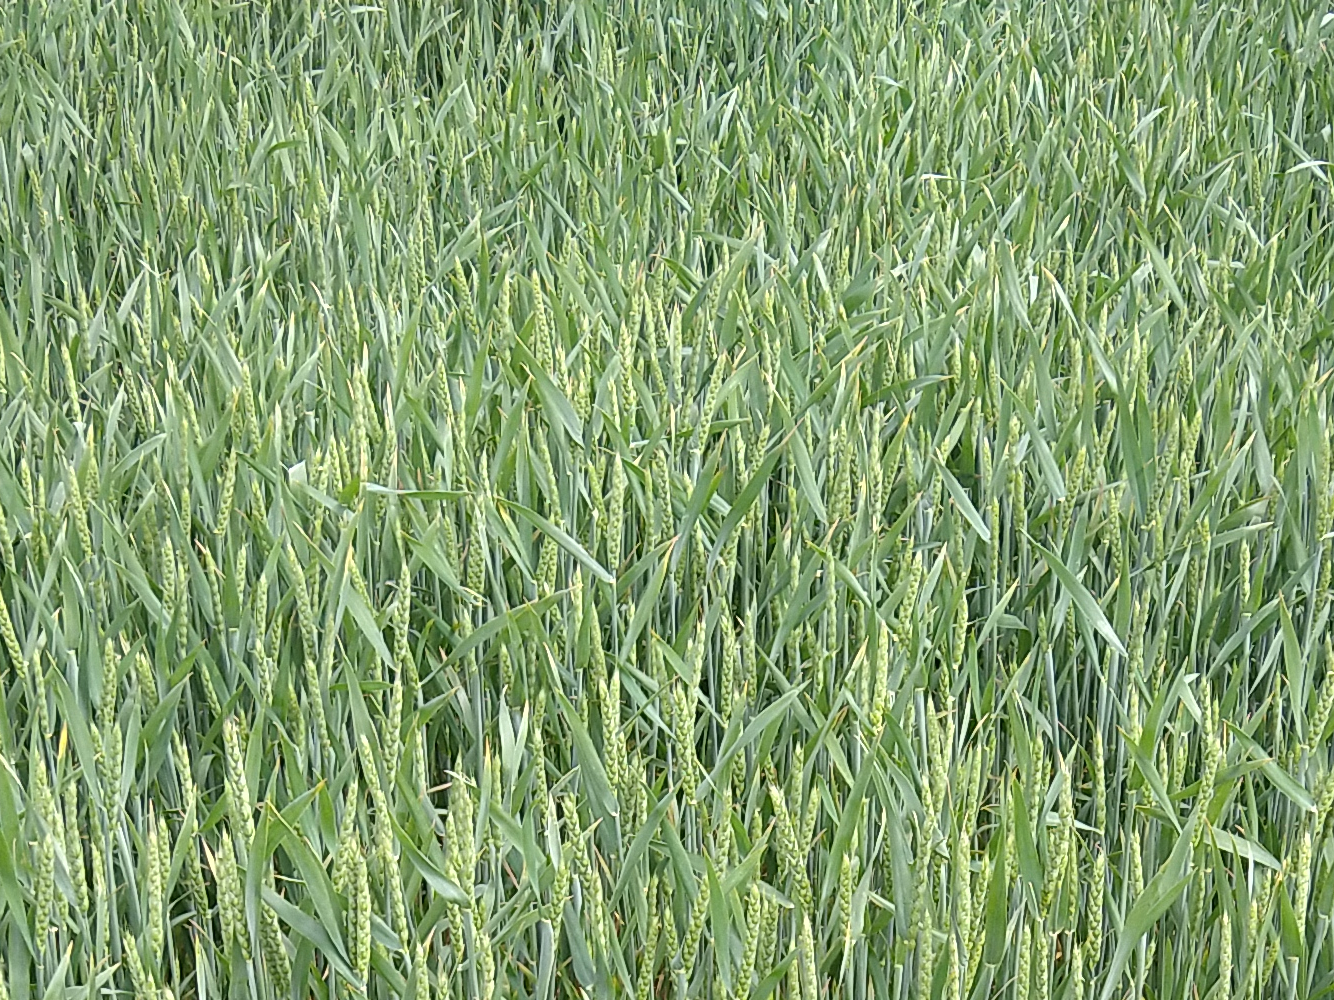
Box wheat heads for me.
[361,367,376,439]
[231,102,249,165]
[650,877,657,917]
[736,118,745,146]
[942,722,955,769]
[768,783,814,913]
[86,459,99,507]
[75,87,89,128]
[496,642,515,698]
[369,19,381,63]
[896,703,919,741]
[912,919,930,1000]
[1256,865,1270,916]
[120,937,149,997]
[687,319,705,398]
[143,391,153,433]
[136,653,159,716]
[423,203,436,272]
[969,348,978,398]
[251,480,269,554]
[1055,339,1084,420]
[735,440,747,499]
[435,960,451,1000]
[530,520,555,579]
[968,854,989,935]
[499,15,514,60]
[791,550,800,596]
[0,474,11,565]
[1009,663,1018,678]
[296,563,313,655]
[1079,146,1100,206]
[731,828,738,866]
[749,420,754,467]
[916,78,925,133]
[510,474,522,512]
[722,519,742,585]
[1129,829,1140,901]
[543,542,558,591]
[693,622,706,689]
[387,170,400,211]
[706,165,719,211]
[221,730,258,847]
[454,412,464,479]
[512,137,521,168]
[931,664,950,724]
[379,183,387,217]
[285,686,307,746]
[94,572,103,617]
[1153,661,1162,695]
[32,521,39,565]
[1028,264,1057,327]
[624,258,637,291]
[643,502,656,554]
[947,932,962,1000]
[1027,735,1044,836]
[612,230,623,265]
[1040,757,1051,795]
[394,50,399,74]
[589,872,608,963]
[258,896,291,995]
[1313,775,1328,806]
[715,975,731,1000]
[343,81,348,114]
[786,946,816,1000]
[187,392,203,446]
[147,166,159,213]
[892,170,905,229]
[929,852,939,903]
[1125,190,1134,228]
[1121,351,1129,391]
[339,289,346,348]
[409,38,420,91]
[701,311,716,357]
[921,427,932,460]
[1017,326,1028,361]
[952,343,960,389]
[171,151,180,193]
[761,329,773,415]
[642,186,651,242]
[1327,764,1334,825]
[859,657,871,714]
[570,568,584,639]
[233,191,240,245]
[1172,313,1182,347]
[1188,751,1222,841]
[1009,706,1016,753]
[21,371,35,405]
[308,517,321,614]
[692,741,699,784]
[835,418,848,458]
[1278,289,1292,345]
[592,314,603,366]
[883,317,902,385]
[591,464,610,526]
[952,598,968,667]
[934,774,946,823]
[812,644,823,699]
[638,771,646,829]
[675,392,692,454]
[649,264,666,302]
[128,25,139,57]
[1086,406,1117,484]
[1110,501,1120,579]
[1145,941,1155,980]
[936,98,953,174]
[988,496,1000,581]
[740,613,757,710]
[739,283,752,324]
[1036,933,1047,1000]
[856,600,866,643]
[1296,838,1312,930]
[467,508,486,594]
[903,340,914,384]
[176,191,190,235]
[836,854,860,947]
[92,844,109,942]
[1056,814,1072,889]
[1067,595,1073,655]
[404,648,418,696]
[1013,468,1025,532]
[758,901,774,977]
[539,447,563,516]
[304,4,313,36]
[1133,597,1142,674]
[952,778,963,813]
[580,218,596,261]
[69,469,87,556]
[892,0,897,30]
[829,430,835,494]
[306,77,315,108]
[1159,738,1166,785]
[665,142,689,231]
[1194,876,1206,929]
[280,383,293,446]
[989,733,996,773]
[1207,603,1221,644]
[21,459,31,508]
[570,290,596,394]
[1245,901,1256,997]
[600,115,613,148]
[1240,541,1249,599]
[1138,338,1148,399]
[1175,726,1189,786]
[932,177,940,217]
[734,891,758,1000]
[799,293,813,321]
[380,674,403,784]
[997,104,1009,153]
[1129,324,1139,385]
[35,648,47,731]
[938,207,952,273]
[233,392,244,450]
[671,306,681,385]
[0,586,27,683]
[1015,207,1036,275]
[267,613,283,662]
[1186,519,1210,625]
[386,291,396,360]
[1212,699,1219,730]
[833,247,849,287]
[1274,676,1284,736]
[977,293,991,337]
[549,601,566,649]
[1176,344,1191,398]
[1067,836,1076,917]
[391,862,408,938]
[492,751,502,806]
[155,472,170,534]
[536,688,546,729]
[824,290,839,324]
[1204,270,1218,328]
[973,398,981,447]
[413,731,426,796]
[90,726,108,786]
[753,491,763,554]
[1072,947,1085,1000]
[1185,407,1204,463]
[1130,686,1140,733]
[1050,91,1055,110]
[31,174,51,232]
[722,610,734,716]
[964,930,987,1000]
[560,794,588,874]
[215,852,236,953]
[790,488,798,548]
[850,451,863,493]
[1079,4,1092,73]
[733,645,746,694]
[159,817,166,896]
[828,530,845,558]
[404,223,417,307]
[921,776,934,826]
[1161,359,1179,398]
[1197,682,1212,747]
[438,130,454,187]
[1039,845,1061,916]
[1156,400,1168,444]
[135,63,143,104]
[1251,162,1261,210]
[708,269,727,313]
[377,846,383,892]
[1007,791,1016,863]
[358,735,382,794]
[384,225,391,267]
[319,183,330,218]
[179,559,192,658]
[48,879,68,919]
[576,166,589,211]
[446,899,463,960]
[357,857,370,976]
[910,819,936,923]
[1103,489,1116,539]
[989,358,1004,413]
[1264,938,1281,981]
[1085,854,1104,956]
[1058,457,1076,519]
[799,789,819,848]
[1313,431,1329,537]
[331,783,356,890]
[251,642,272,706]
[123,368,146,443]
[616,726,625,769]
[1127,588,1151,671]
[824,442,853,530]
[954,831,968,944]
[587,601,608,689]
[546,866,571,927]
[1016,925,1032,1000]
[597,36,610,78]
[459,142,466,177]
[304,658,333,765]
[692,519,708,582]
[664,190,672,221]
[61,343,80,421]
[36,836,52,949]
[1092,727,1104,830]
[460,869,482,926]
[749,424,770,484]
[1040,666,1050,718]
[147,508,161,565]
[443,812,458,884]
[224,829,251,957]
[824,553,836,651]
[665,906,677,962]
[237,545,247,601]
[142,290,150,347]
[1275,738,1288,764]
[596,453,606,491]
[712,791,732,873]
[370,249,376,288]
[926,439,950,510]
[1137,781,1159,803]
[145,974,170,1000]
[310,205,327,293]
[1047,142,1064,197]
[252,572,269,644]
[1068,242,1072,299]
[1105,642,1110,682]
[348,344,354,376]
[572,379,589,422]
[881,439,903,510]
[212,315,233,350]
[347,856,357,963]
[926,696,948,773]
[931,385,945,429]
[649,640,668,696]
[1003,418,1019,508]
[670,539,684,581]
[768,596,784,637]
[610,455,626,565]
[0,332,8,383]
[1110,254,1118,282]
[36,363,50,420]
[218,453,236,534]
[478,927,496,1000]
[1097,304,1108,348]
[679,875,710,975]
[475,29,482,59]
[38,475,44,510]
[1181,106,1195,144]
[95,643,114,723]
[955,508,963,576]
[823,114,829,159]
[434,359,454,420]
[590,185,602,223]
[901,551,922,626]
[393,563,409,661]
[1061,772,1074,816]
[493,275,508,341]
[598,680,618,786]
[857,125,863,155]
[1152,619,1169,682]
[0,930,12,1000]
[881,826,896,903]
[1219,251,1229,301]
[962,741,982,835]
[1206,76,1219,138]
[1039,611,1049,651]
[440,516,459,584]
[789,385,812,451]
[339,440,353,482]
[651,300,670,348]
[764,752,779,784]
[379,429,394,519]
[787,439,794,478]
[771,340,785,386]
[1267,232,1279,287]
[1261,471,1285,535]
[51,802,67,844]
[1127,93,1136,142]
[387,253,401,305]
[774,830,786,879]
[688,354,725,450]
[638,917,659,1000]
[559,228,582,299]
[106,440,117,476]
[1162,468,1177,513]
[479,444,493,502]
[162,534,175,632]
[348,281,363,346]
[1075,268,1089,313]
[1149,142,1164,203]
[1155,513,1164,587]
[620,323,636,414]
[1222,915,1232,990]
[64,781,87,911]
[872,625,888,728]
[450,772,473,877]
[531,729,546,814]
[78,291,92,369]
[293,55,306,100]
[1148,422,1180,508]
[907,451,919,503]
[1319,560,1331,606]
[146,820,164,961]
[1067,447,1088,528]
[400,135,411,179]
[295,141,300,204]
[1148,403,1155,451]
[612,670,618,732]
[627,290,644,355]
[1313,735,1334,841]
[751,808,762,842]
[206,552,221,625]
[786,182,796,237]
[189,834,207,902]
[179,415,187,487]
[126,129,140,190]
[735,742,743,792]
[414,944,429,1000]
[173,374,192,418]
[104,725,123,822]
[789,747,804,832]
[786,629,798,675]
[577,691,588,724]
[242,362,260,443]
[653,449,672,539]
[350,556,372,620]
[1180,453,1189,510]
[1292,293,1314,350]
[1176,698,1185,729]
[202,664,221,719]
[352,368,365,483]
[40,525,51,567]
[866,346,877,390]
[86,798,107,854]
[552,347,565,389]
[532,276,555,374]
[526,633,537,706]
[179,743,192,808]
[897,628,915,659]
[667,691,696,794]
[330,442,341,494]
[92,287,101,313]
[1307,652,1334,750]
[1068,338,1082,403]
[453,261,478,336]
[621,768,640,839]
[410,217,427,290]
[575,515,598,552]
[174,317,185,356]
[869,422,881,512]
[984,439,990,502]
[181,489,190,537]
[477,151,484,180]
[798,926,820,1000]
[315,450,331,520]
[37,764,52,819]
[373,789,394,862]
[485,151,493,183]
[899,536,913,587]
